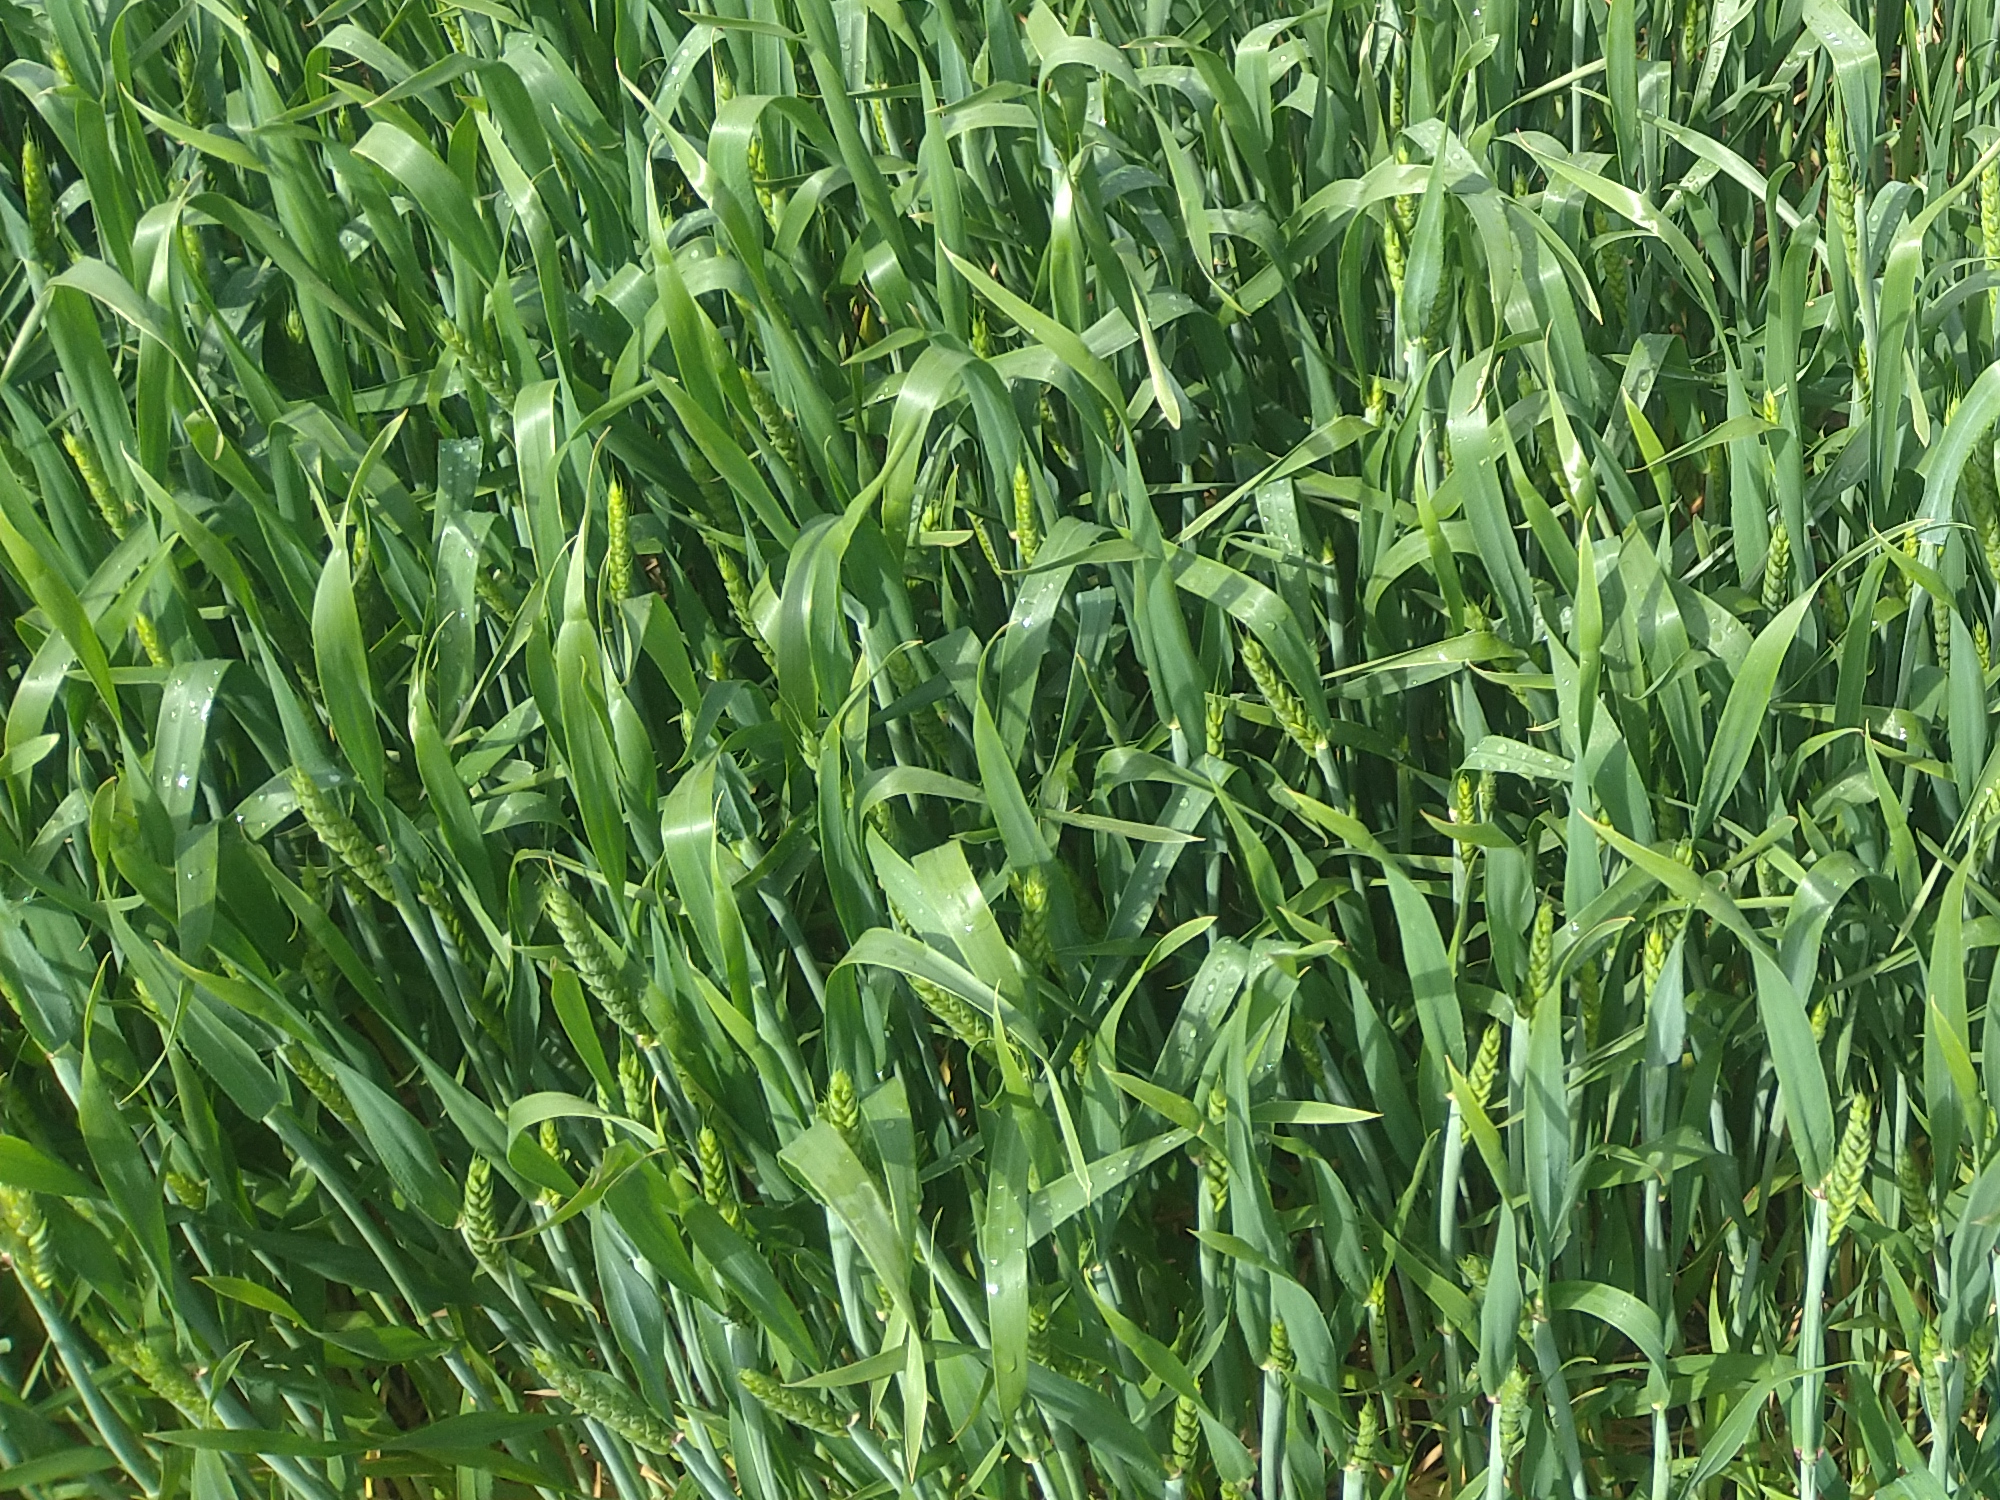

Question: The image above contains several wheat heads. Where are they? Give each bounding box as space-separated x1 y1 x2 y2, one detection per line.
291 768 395 884
607 480 633 601
1391 133 1421 241
78 1316 164 1380
1978 828 1992 869
1268 1312 1291 1375
887 652 949 754
1595 209 1631 323
1456 1254 1537 1345
671 1046 705 1110
177 30 203 151
1663 843 1694 956
1466 605 1527 701
1459 1019 1503 1148
1824 1096 1871 1243
435 0 471 85
1480 767 1497 801
911 1232 928 1266
181 221 204 272
737 1367 851 1435
1015 880 1047 966
829 1068 864 1152
1501 1371 1527 1454
1900 1148 1943 1233
1218 1454 1255 1498
1025 1301 1049 1368
1820 574 1850 638
62 427 130 541
4 984 28 1029
166 1170 206 1208
1517 903 1556 1008
923 503 945 539
1514 166 1528 200
1645 928 1666 1018
131 609 172 670
811 1101 829 1125
1239 637 1320 746
430 888 471 963
1349 1398 1377 1468
1444 429 1453 482
678 445 737 537
970 510 998 569
740 369 799 483
905 972 1011 1063
1943 392 1962 430
282 309 316 391
1581 953 1603 1056
1986 754 2000 838
866 1112 886 1180
740 304 768 355
261 600 326 696
1453 773 1471 864
617 1044 650 1130
1016 461 1044 563
346 532 376 630
1047 1345 1082 1384
1973 619 1989 677
715 69 738 116
1368 1273 1385 1346
878 1270 896 1313
48 38 73 89
716 541 778 671
1035 395 1075 465
1807 1002 1826 1048
1981 142 2000 312
1656 764 1690 838
1055 858 1109 942
1899 524 1920 603
865 85 891 154
697 1127 742 1235
295 1057 348 1115
878 796 905 862
1104 408 1115 445
597 1081 616 1149
1930 590 1950 671
796 729 853 798
969 311 990 361
474 564 515 623
1389 40 1408 148
1962 792 1989 835
1920 1322 1950 1424
437 312 522 414
1761 519 1789 618
1973 427 1998 507
746 122 774 222
297 863 323 982
1684 0 1696 58
1205 693 1227 759
1961 462 2000 611
463 1150 506 1275
1070 1022 1086 1072
526 1353 681 1458
1712 446 1725 525
142 1350 227 1431
1777 1304 1804 1342
889 895 928 942
540 1115 562 1209
1204 1088 1233 1209
1173 1382 1200 1471
1423 256 1450 340
1382 203 1403 286
1965 1316 1998 1418
1366 374 1386 429
545 888 653 1043
1519 371 1575 504
1762 389 1775 427
1592 806 1611 855
1860 340 1871 417
1824 112 1861 272
21 140 67 269
0 1184 54 1286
